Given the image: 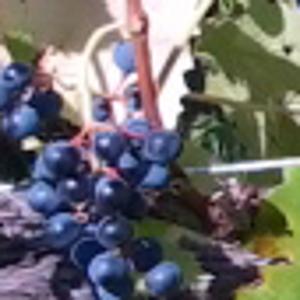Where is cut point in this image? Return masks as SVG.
Segmentation results:
<instances>
[{
    "instance_id": "1",
    "label": "cut point",
    "mask_w": 300,
    "mask_h": 300,
    "mask_svg": "<svg viewBox=\"0 0 300 300\" xmlns=\"http://www.w3.org/2000/svg\"><path fill=\"white\" fill-rule=\"evenodd\" d=\"M129 23V18L127 16H120L119 18L109 22L105 26L98 28L91 36L90 42L85 48L83 55L80 58L78 64V80L79 82V93L80 98V110L82 117L84 119H89L91 117L90 109V91L88 88L89 77L87 75V69L90 61L92 60L96 49L99 46L101 39L115 30L124 27Z\"/></svg>"
}]
</instances>
